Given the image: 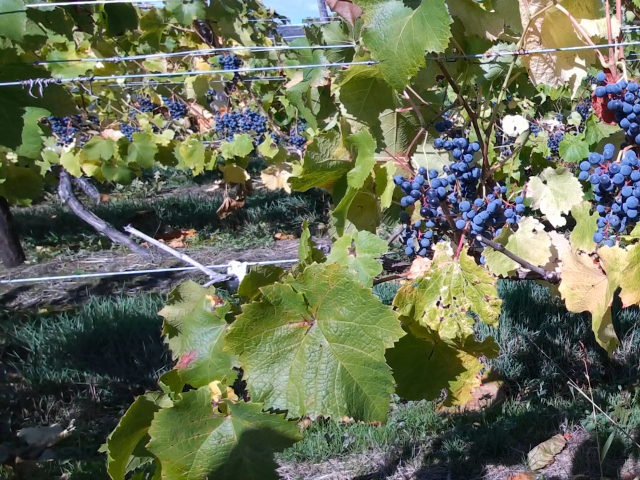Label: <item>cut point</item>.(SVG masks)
<instances>
[{
  "mask_svg": "<svg viewBox=\"0 0 640 480\" xmlns=\"http://www.w3.org/2000/svg\"><path fill=\"white\" fill-rule=\"evenodd\" d=\"M427 136H428V128L425 129V134H424V138H423V141H422V152H423L424 160H427V154H426V149H425Z\"/></svg>",
  "mask_w": 640,
  "mask_h": 480,
  "instance_id": "6a23745f",
  "label": "cut point"
}]
</instances>
